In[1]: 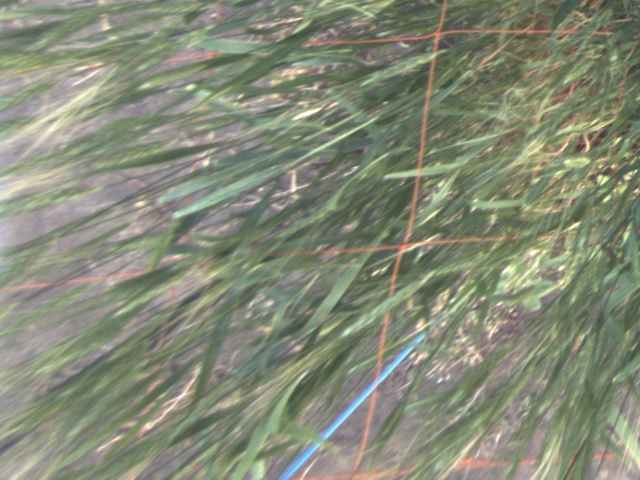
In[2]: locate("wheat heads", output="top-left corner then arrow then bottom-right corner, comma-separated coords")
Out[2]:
96,140 -> 175,171
113,263 -> 199,320
129,28 -> 207,70
489,362 -> 536,425
141,61 -> 207,87
4,190 -> 104,213
537,336 -> 596,419
133,0 -> 204,11
119,235 -> 169,254
29,8 -> 103,49
336,270 -> 428,343
367,53 -> 442,80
